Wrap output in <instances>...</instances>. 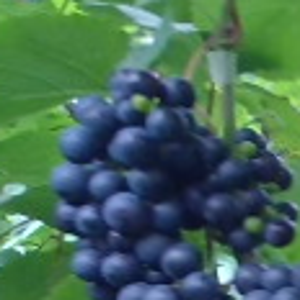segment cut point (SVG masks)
Masks as SVG:
<instances>
[{
  "instance_id": "cut-point-1",
  "label": "cut point",
  "mask_w": 300,
  "mask_h": 300,
  "mask_svg": "<svg viewBox=\"0 0 300 300\" xmlns=\"http://www.w3.org/2000/svg\"><path fill=\"white\" fill-rule=\"evenodd\" d=\"M219 42L218 37H211L208 38L206 43L199 47L194 53L192 58L190 59L186 71H185V77L190 78L194 75V72L196 70V67L198 66L201 59L204 57V55L207 53V51L211 48L213 44H216Z\"/></svg>"
}]
</instances>
